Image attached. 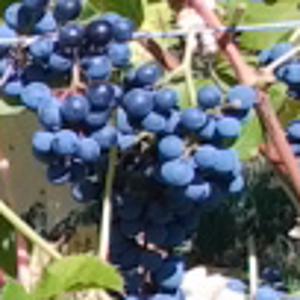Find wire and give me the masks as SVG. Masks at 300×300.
Here are the masks:
<instances>
[{"label":"wire","instance_id":"wire-1","mask_svg":"<svg viewBox=\"0 0 300 300\" xmlns=\"http://www.w3.org/2000/svg\"><path fill=\"white\" fill-rule=\"evenodd\" d=\"M299 25H300V20L274 22V23H235V24H229L221 27H199L195 29V33L299 27Z\"/></svg>","mask_w":300,"mask_h":300},{"label":"wire","instance_id":"wire-2","mask_svg":"<svg viewBox=\"0 0 300 300\" xmlns=\"http://www.w3.org/2000/svg\"><path fill=\"white\" fill-rule=\"evenodd\" d=\"M189 27L178 28V29H167V30H143L138 31L132 37V39L137 40L141 38L151 37V36H174L187 34Z\"/></svg>","mask_w":300,"mask_h":300},{"label":"wire","instance_id":"wire-3","mask_svg":"<svg viewBox=\"0 0 300 300\" xmlns=\"http://www.w3.org/2000/svg\"><path fill=\"white\" fill-rule=\"evenodd\" d=\"M26 36L0 38V44L26 42Z\"/></svg>","mask_w":300,"mask_h":300}]
</instances>
